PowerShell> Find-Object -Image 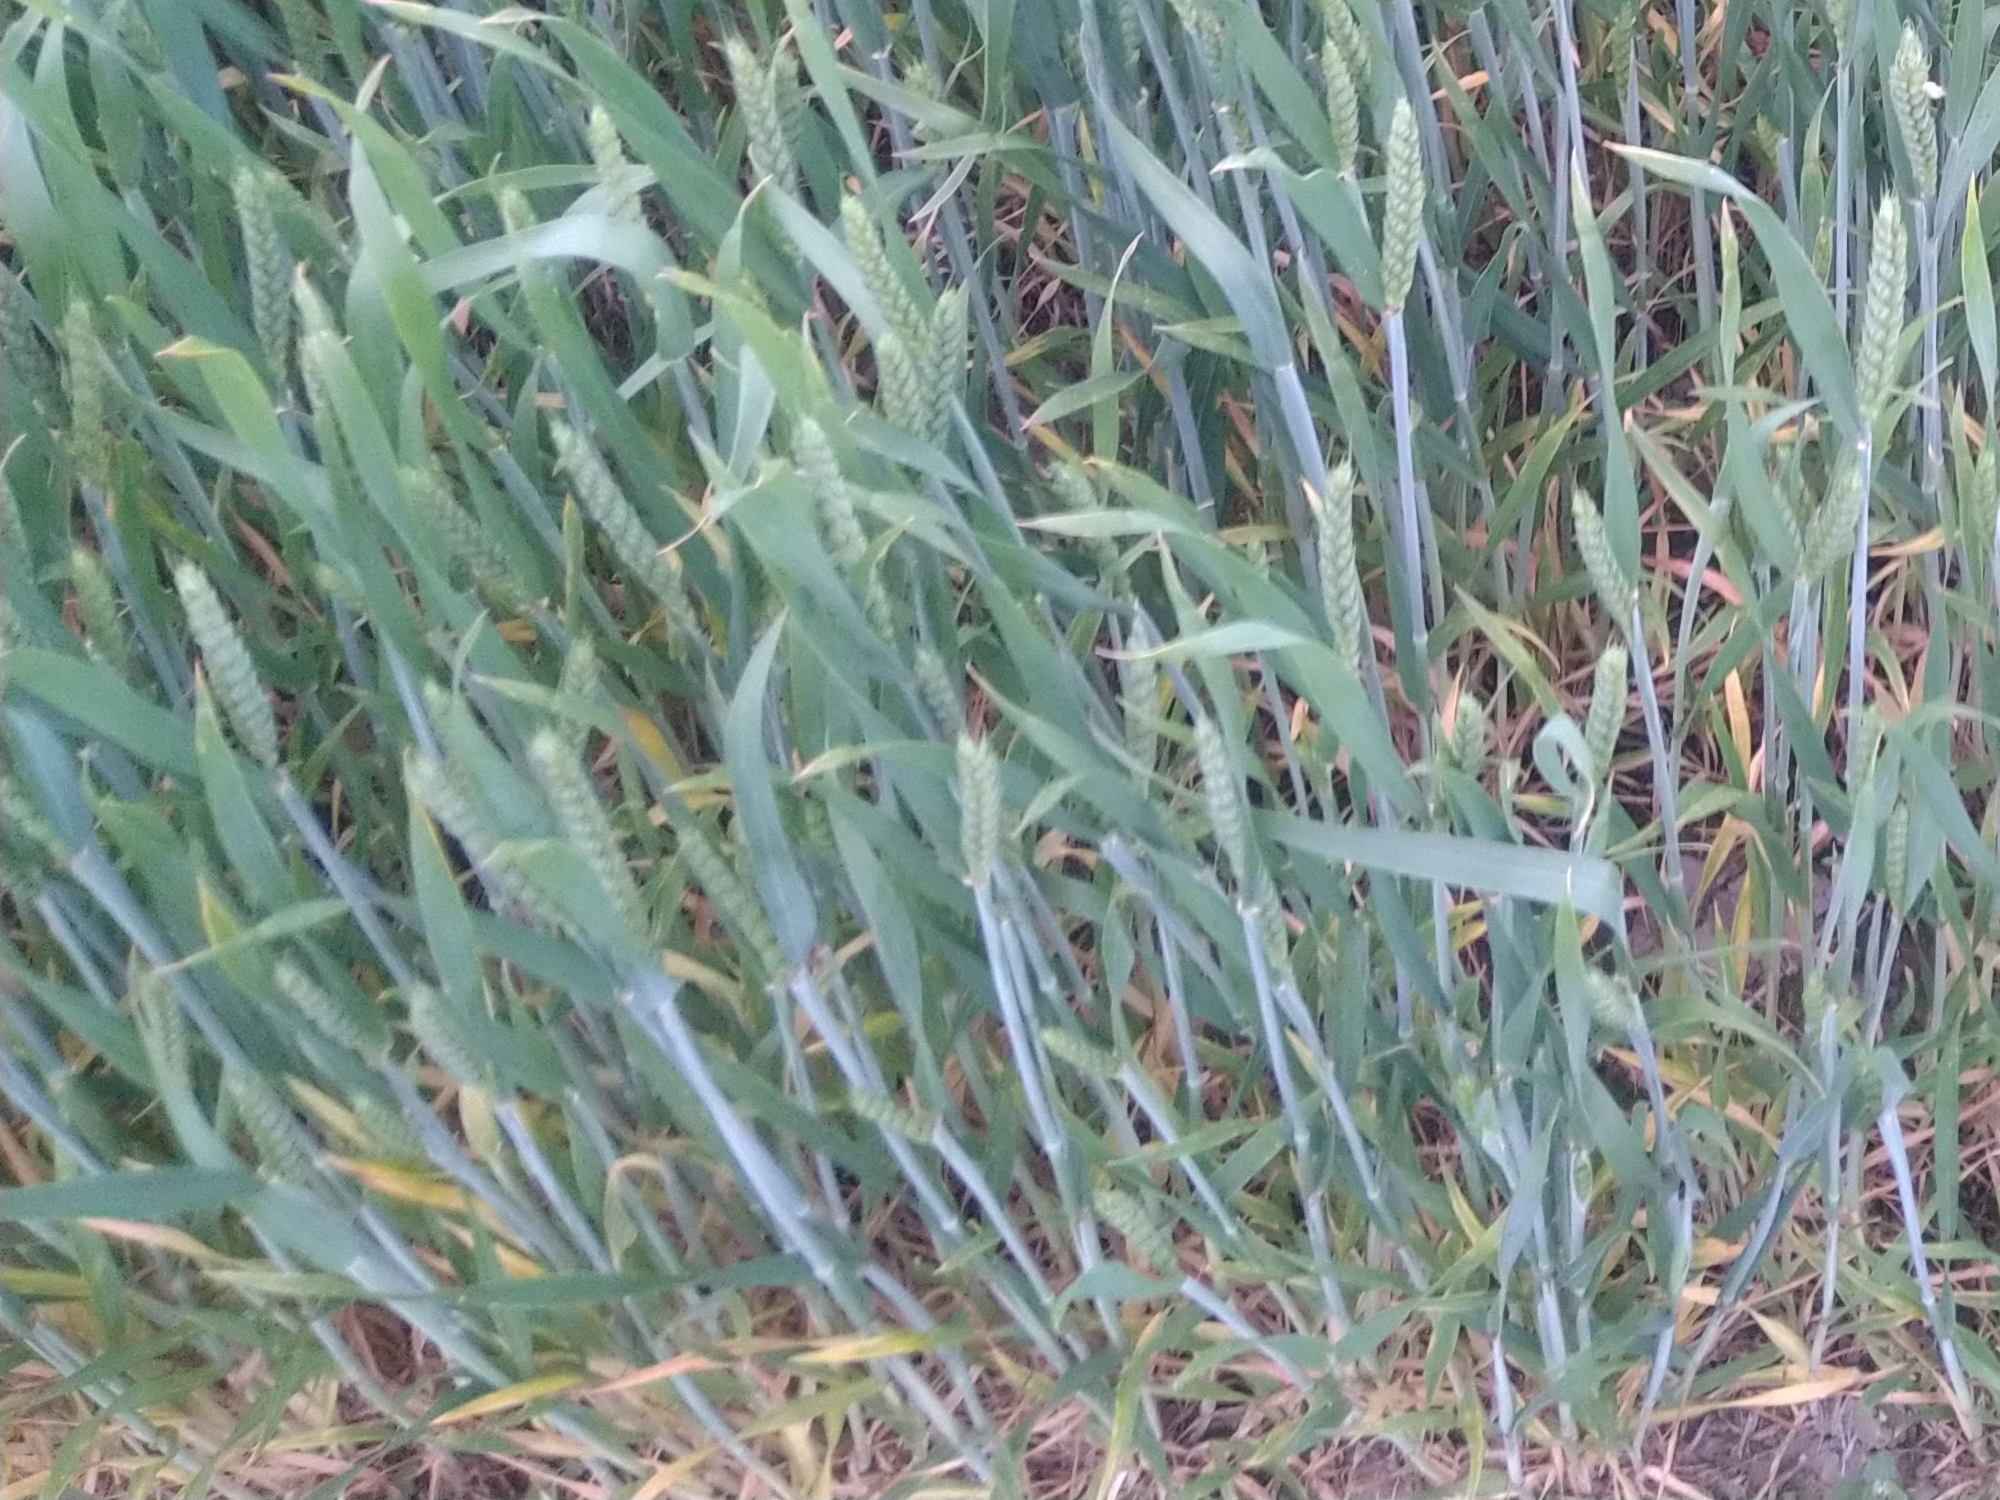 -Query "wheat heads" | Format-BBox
[1934,0,1954,38]
[726,41,797,198]
[1757,115,1779,164]
[916,653,961,727]
[1124,622,1159,780]
[775,53,804,159]
[804,799,840,868]
[384,0,425,27]
[1196,720,1244,856]
[144,975,187,1071]
[1767,477,1811,547]
[1854,708,1882,790]
[71,551,128,673]
[1572,488,1632,620]
[840,198,932,364]
[0,476,34,585]
[1062,29,1088,90]
[356,1102,437,1162]
[739,275,772,316]
[272,0,327,83]
[959,738,1000,872]
[920,291,965,445]
[406,754,573,925]
[1891,27,1939,191]
[235,169,292,381]
[1886,802,1908,903]
[558,639,598,753]
[1114,0,1141,57]
[1821,0,1849,39]
[849,1092,934,1141]
[1815,218,1831,281]
[300,339,323,414]
[1050,464,1133,599]
[401,473,529,609]
[68,302,110,482]
[406,982,487,1091]
[877,336,922,434]
[1,777,72,866]
[1259,871,1289,968]
[588,107,642,222]
[1382,98,1425,306]
[1802,477,1869,575]
[0,266,70,428]
[536,738,646,929]
[793,418,890,641]
[1580,967,1630,1036]
[1321,41,1358,171]
[1041,1029,1125,1076]
[1587,649,1629,778]
[500,193,548,294]
[1316,0,1371,92]
[551,428,694,618]
[175,565,279,761]
[1094,1189,1178,1272]
[1614,10,1631,99]
[234,1080,308,1180]
[276,964,389,1056]
[0,607,41,647]
[1976,451,1997,546]
[678,832,787,974]
[1455,697,1486,773]
[1320,476,1362,668]
[1854,196,1908,398]
[74,0,167,69]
